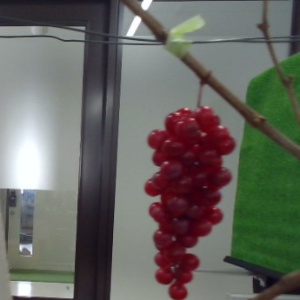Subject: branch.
<instances>
[{"mask_svg": "<svg viewBox=\"0 0 300 300\" xmlns=\"http://www.w3.org/2000/svg\"><path fill=\"white\" fill-rule=\"evenodd\" d=\"M182 61L194 70L207 86L212 88L216 94L223 97L230 107L244 117L254 128L259 129L263 135L275 141L285 150L292 152L297 159H300V148L295 143L289 141L273 124L248 109L235 93L228 90L223 83L217 81L212 71H209L200 63L192 52L183 57Z\"/></svg>", "mask_w": 300, "mask_h": 300, "instance_id": "obj_1", "label": "branch"}, {"mask_svg": "<svg viewBox=\"0 0 300 300\" xmlns=\"http://www.w3.org/2000/svg\"><path fill=\"white\" fill-rule=\"evenodd\" d=\"M267 4H268V1L263 0V22L256 23V27H258L260 29V31H262V33H263V36H264V39H265V42H266V45H267V48H268L270 58H271L272 62L274 63L276 71L279 74V76H280V78L283 82V85L285 86V88L287 89V91L289 93L290 99L293 101L294 113L297 116V118H300V110L298 108V105L296 103V99H295V97L292 93V90L290 88L291 81L286 80L285 76L282 74V71L280 70L279 65H278V59L275 56L274 50H273V48L271 46V43H270V40H269L268 21H267Z\"/></svg>", "mask_w": 300, "mask_h": 300, "instance_id": "obj_3", "label": "branch"}, {"mask_svg": "<svg viewBox=\"0 0 300 300\" xmlns=\"http://www.w3.org/2000/svg\"><path fill=\"white\" fill-rule=\"evenodd\" d=\"M120 2H123L128 7V10H131L133 14L143 21L145 27L152 32L153 36L160 43L166 44L169 28L164 27L156 21L148 11L140 6L137 0H120Z\"/></svg>", "mask_w": 300, "mask_h": 300, "instance_id": "obj_2", "label": "branch"}]
</instances>
